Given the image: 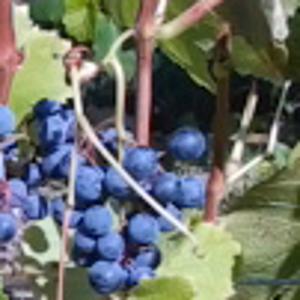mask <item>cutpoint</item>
<instances>
[{"label":"cut point","mask_w":300,"mask_h":300,"mask_svg":"<svg viewBox=\"0 0 300 300\" xmlns=\"http://www.w3.org/2000/svg\"><path fill=\"white\" fill-rule=\"evenodd\" d=\"M133 34H138V29H125L119 39L109 48L108 56L110 57V64L114 68V83H115V107L117 111V131L120 135L125 132V69L124 64L115 56V52L120 48L124 40Z\"/></svg>","instance_id":"1"}]
</instances>
